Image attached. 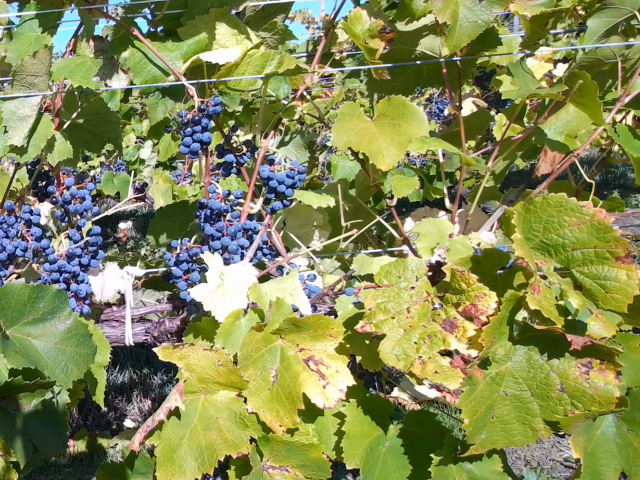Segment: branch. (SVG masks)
Segmentation results:
<instances>
[{"instance_id":"982ccf7c","label":"branch","mask_w":640,"mask_h":480,"mask_svg":"<svg viewBox=\"0 0 640 480\" xmlns=\"http://www.w3.org/2000/svg\"><path fill=\"white\" fill-rule=\"evenodd\" d=\"M461 81H462V63H457V79H456V97L458 100V130L460 134L461 152L467 153L465 132L463 128V98L461 94Z\"/></svg>"},{"instance_id":"170604dd","label":"branch","mask_w":640,"mask_h":480,"mask_svg":"<svg viewBox=\"0 0 640 480\" xmlns=\"http://www.w3.org/2000/svg\"><path fill=\"white\" fill-rule=\"evenodd\" d=\"M96 12L99 15H102L103 17H105L108 20H111L112 22H115L117 25H119L120 27H122L123 29H125L126 31L132 33L133 35H135L142 43L143 45L147 48V50L152 53L156 58H158L159 60H161L166 66L167 68L171 71V73L179 80L181 81H185L186 77L180 75L175 67L167 60L166 57H164L162 54H160L155 48H153L149 42L147 41V39L136 29L128 26L127 24H125L124 22H122L121 20H119L117 17L108 14L107 12H105L104 10H102L101 8H97Z\"/></svg>"},{"instance_id":"1af6ec82","label":"branch","mask_w":640,"mask_h":480,"mask_svg":"<svg viewBox=\"0 0 640 480\" xmlns=\"http://www.w3.org/2000/svg\"><path fill=\"white\" fill-rule=\"evenodd\" d=\"M273 235L274 236L270 237V240L275 244L277 250L279 251V253H280V255H281L282 259H283V261L285 263H288L289 262V258H288V256L286 255V252L283 249L284 243H283L282 239L280 238L277 229L273 230Z\"/></svg>"},{"instance_id":"ca6c30ca","label":"branch","mask_w":640,"mask_h":480,"mask_svg":"<svg viewBox=\"0 0 640 480\" xmlns=\"http://www.w3.org/2000/svg\"><path fill=\"white\" fill-rule=\"evenodd\" d=\"M465 172H466V168L462 167L461 170H460V179H459V184H458V187H457L456 196L454 198V202H453V205H452V214H451V224L452 225H455L456 221H457V208H458L459 200L461 199L462 189H463V186H464Z\"/></svg>"},{"instance_id":"1ff4a987","label":"branch","mask_w":640,"mask_h":480,"mask_svg":"<svg viewBox=\"0 0 640 480\" xmlns=\"http://www.w3.org/2000/svg\"><path fill=\"white\" fill-rule=\"evenodd\" d=\"M344 4H345V0H340L339 1L338 5L335 8L333 16H332L330 22L327 25V29L322 33L321 41H320V45H319V47L317 49V53L314 56V58L312 60V63L310 64V68L311 69L315 68L319 58L322 56V51H323V49L325 47V44H326V38L329 35V33L332 31L333 25L335 24V22H336V20H337V18L339 16L340 10H341V8L343 7Z\"/></svg>"},{"instance_id":"325d2c04","label":"branch","mask_w":640,"mask_h":480,"mask_svg":"<svg viewBox=\"0 0 640 480\" xmlns=\"http://www.w3.org/2000/svg\"><path fill=\"white\" fill-rule=\"evenodd\" d=\"M347 151L352 154L355 159L361 164V166L364 168L366 174L369 176V178L372 180V182L376 185L383 201L388 205L390 213L394 216L397 225H398V229L402 234V237L404 238L405 244L409 246V250L411 251V253L414 255V257L417 260L421 259L420 254L418 253V251L415 249V247L413 246V244L411 243L409 236L405 230V228L403 227V222L399 216V214L395 211V207L393 206V203L388 199L382 184L379 182V180L375 177V175L372 173V171L370 170L369 166L366 164V162L364 161V159L359 155L358 152H356L352 147H348Z\"/></svg>"},{"instance_id":"1d269e1b","label":"branch","mask_w":640,"mask_h":480,"mask_svg":"<svg viewBox=\"0 0 640 480\" xmlns=\"http://www.w3.org/2000/svg\"><path fill=\"white\" fill-rule=\"evenodd\" d=\"M210 157H211V149L209 147H205L204 158H205L206 179L203 182V196L205 199L209 198L208 184L211 183Z\"/></svg>"},{"instance_id":"a944a4c4","label":"branch","mask_w":640,"mask_h":480,"mask_svg":"<svg viewBox=\"0 0 640 480\" xmlns=\"http://www.w3.org/2000/svg\"><path fill=\"white\" fill-rule=\"evenodd\" d=\"M312 74L311 75H306V78L304 80V82L302 83V85L299 87L297 93L291 97L292 101H296L297 99L300 98V96L302 95V93L304 92L305 88L308 86L310 80H311Z\"/></svg>"},{"instance_id":"30e6481e","label":"branch","mask_w":640,"mask_h":480,"mask_svg":"<svg viewBox=\"0 0 640 480\" xmlns=\"http://www.w3.org/2000/svg\"><path fill=\"white\" fill-rule=\"evenodd\" d=\"M283 118L279 117L276 121V123L273 125L272 129L269 131L266 139L264 140V144L263 147L259 153V156L257 158V162L253 171V174L250 178L249 174L246 172L245 167L241 166L240 167V172L243 175L245 181L247 182L248 188L247 191L245 192V196H244V200H243V206H242V211H241V215H240V221L244 222L245 218H246V213H247V208H248V202H249V198L250 195L252 196V199L254 202L258 201V196L256 194V190L254 188V183L256 181V178L258 176L259 170L261 168V164L262 161L264 160V155L268 149L269 146V142L271 141V139L273 138V135L275 134V132L277 131V129L279 128V126L282 124Z\"/></svg>"},{"instance_id":"2b1400db","label":"branch","mask_w":640,"mask_h":480,"mask_svg":"<svg viewBox=\"0 0 640 480\" xmlns=\"http://www.w3.org/2000/svg\"><path fill=\"white\" fill-rule=\"evenodd\" d=\"M62 104V96H55L53 101L54 125L53 130L57 131L59 127V111Z\"/></svg>"},{"instance_id":"ea751061","label":"branch","mask_w":640,"mask_h":480,"mask_svg":"<svg viewBox=\"0 0 640 480\" xmlns=\"http://www.w3.org/2000/svg\"><path fill=\"white\" fill-rule=\"evenodd\" d=\"M639 74H640V63L637 64V67L635 69L634 74L632 75V78L629 80L628 84L626 85V87L622 91L619 99L615 102L614 107L611 109L609 115L605 119L606 123H610L611 122V120L614 117L616 111L619 109L621 103L624 101L626 95L629 93L630 89L632 88V86L634 85L635 81L637 80Z\"/></svg>"},{"instance_id":"8bde2521","label":"branch","mask_w":640,"mask_h":480,"mask_svg":"<svg viewBox=\"0 0 640 480\" xmlns=\"http://www.w3.org/2000/svg\"><path fill=\"white\" fill-rule=\"evenodd\" d=\"M83 26H84V23L83 22H79L77 27L75 28V30L73 32V35H72V38H71L70 42L67 45V48H66V51H65V54H64L65 58H68L70 56L72 47L74 46V44H75V42H76V40L78 38V35H79L81 29L83 28Z\"/></svg>"},{"instance_id":"45aa463d","label":"branch","mask_w":640,"mask_h":480,"mask_svg":"<svg viewBox=\"0 0 640 480\" xmlns=\"http://www.w3.org/2000/svg\"><path fill=\"white\" fill-rule=\"evenodd\" d=\"M603 130V126L599 125L587 138L582 146L579 147L577 151H575L571 156L567 157L562 165L558 168V170L553 173L549 178L544 180L538 187H536L530 194L525 198L526 202H530L537 194L540 192L546 185H549L553 180L561 175V173L566 169L567 165L573 161L576 157L582 154V152L590 145L593 139Z\"/></svg>"},{"instance_id":"afce2bb1","label":"branch","mask_w":640,"mask_h":480,"mask_svg":"<svg viewBox=\"0 0 640 480\" xmlns=\"http://www.w3.org/2000/svg\"><path fill=\"white\" fill-rule=\"evenodd\" d=\"M213 122H214V123H215V125L218 127V130L220 131L221 135H222L223 137H226V136H227V132H226V130L224 129V127H223L222 123L219 121V119H218V118H214V119H213Z\"/></svg>"}]
</instances>
